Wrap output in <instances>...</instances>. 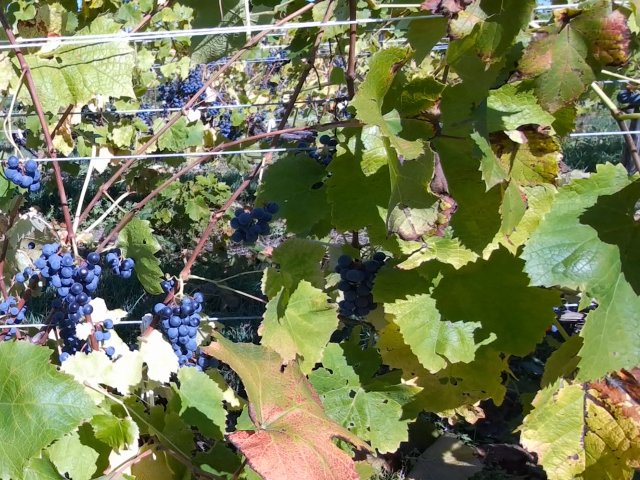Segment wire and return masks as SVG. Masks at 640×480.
Instances as JSON below:
<instances>
[{
    "label": "wire",
    "instance_id": "wire-1",
    "mask_svg": "<svg viewBox=\"0 0 640 480\" xmlns=\"http://www.w3.org/2000/svg\"><path fill=\"white\" fill-rule=\"evenodd\" d=\"M446 13L441 14H415L408 16H382L355 19L319 20L306 23H285L274 25L239 26L237 27H201L186 30L155 31L144 33L130 32H98L83 35H48L19 38V43H8V38H0V49L26 48V47H74L86 46L105 42H130L137 40L176 39L180 37L215 36L222 34H239L252 31H265L287 28H308L321 25L357 24L384 21H410L417 19H443Z\"/></svg>",
    "mask_w": 640,
    "mask_h": 480
},
{
    "label": "wire",
    "instance_id": "wire-2",
    "mask_svg": "<svg viewBox=\"0 0 640 480\" xmlns=\"http://www.w3.org/2000/svg\"><path fill=\"white\" fill-rule=\"evenodd\" d=\"M335 145H308L292 147L289 149H237L233 151L215 152H190V153H154V154H128L123 156L100 155L84 157H42V158H18V163H44V162H87L96 160L125 161L130 159H157V158H192V157H218L235 156L240 154H291L311 150H335Z\"/></svg>",
    "mask_w": 640,
    "mask_h": 480
},
{
    "label": "wire",
    "instance_id": "wire-3",
    "mask_svg": "<svg viewBox=\"0 0 640 480\" xmlns=\"http://www.w3.org/2000/svg\"><path fill=\"white\" fill-rule=\"evenodd\" d=\"M57 327V322L45 321L41 323H8V324H0V329H11V328H43V327Z\"/></svg>",
    "mask_w": 640,
    "mask_h": 480
}]
</instances>
